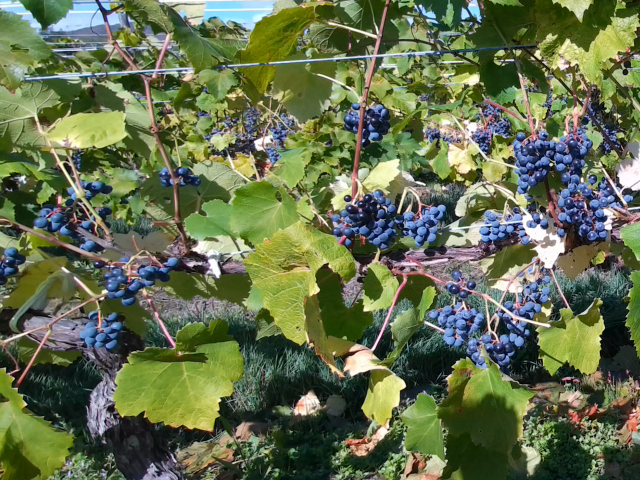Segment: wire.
<instances>
[{
    "instance_id": "obj_2",
    "label": "wire",
    "mask_w": 640,
    "mask_h": 480,
    "mask_svg": "<svg viewBox=\"0 0 640 480\" xmlns=\"http://www.w3.org/2000/svg\"><path fill=\"white\" fill-rule=\"evenodd\" d=\"M192 66H168L161 68H139V69H117L106 71H83V72H57L41 75L27 76V81L44 80L59 77H85V76H108L119 74H141V73H163L170 71H192Z\"/></svg>"
},
{
    "instance_id": "obj_1",
    "label": "wire",
    "mask_w": 640,
    "mask_h": 480,
    "mask_svg": "<svg viewBox=\"0 0 640 480\" xmlns=\"http://www.w3.org/2000/svg\"><path fill=\"white\" fill-rule=\"evenodd\" d=\"M537 42L521 43L512 45H495V46H463L452 49H432L419 52H397V53H368V54H352L341 55L335 57H316L311 59H294L281 61H264V62H243V63H226L216 65V70L228 68H245V67H266V66H283L296 64H313L318 62H337L343 60L354 59H370V58H400V57H421L435 54H454L466 51H497V50H514L537 47Z\"/></svg>"
},
{
    "instance_id": "obj_3",
    "label": "wire",
    "mask_w": 640,
    "mask_h": 480,
    "mask_svg": "<svg viewBox=\"0 0 640 480\" xmlns=\"http://www.w3.org/2000/svg\"><path fill=\"white\" fill-rule=\"evenodd\" d=\"M490 222H480V223H471V224H460L457 226H453L450 228H439V233H453L455 231L463 230V229H473V228H482V227H490Z\"/></svg>"
}]
</instances>
